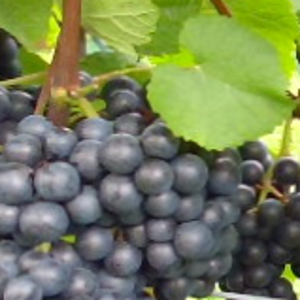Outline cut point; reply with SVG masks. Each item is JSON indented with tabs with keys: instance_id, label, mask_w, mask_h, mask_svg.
Returning a JSON list of instances; mask_svg holds the SVG:
<instances>
[{
	"instance_id": "cut-point-1",
	"label": "cut point",
	"mask_w": 300,
	"mask_h": 300,
	"mask_svg": "<svg viewBox=\"0 0 300 300\" xmlns=\"http://www.w3.org/2000/svg\"><path fill=\"white\" fill-rule=\"evenodd\" d=\"M55 96L59 99L66 100L69 104L78 106L88 120L102 118V114L96 110L94 104L84 95L71 96L63 88H60L55 92Z\"/></svg>"
}]
</instances>
